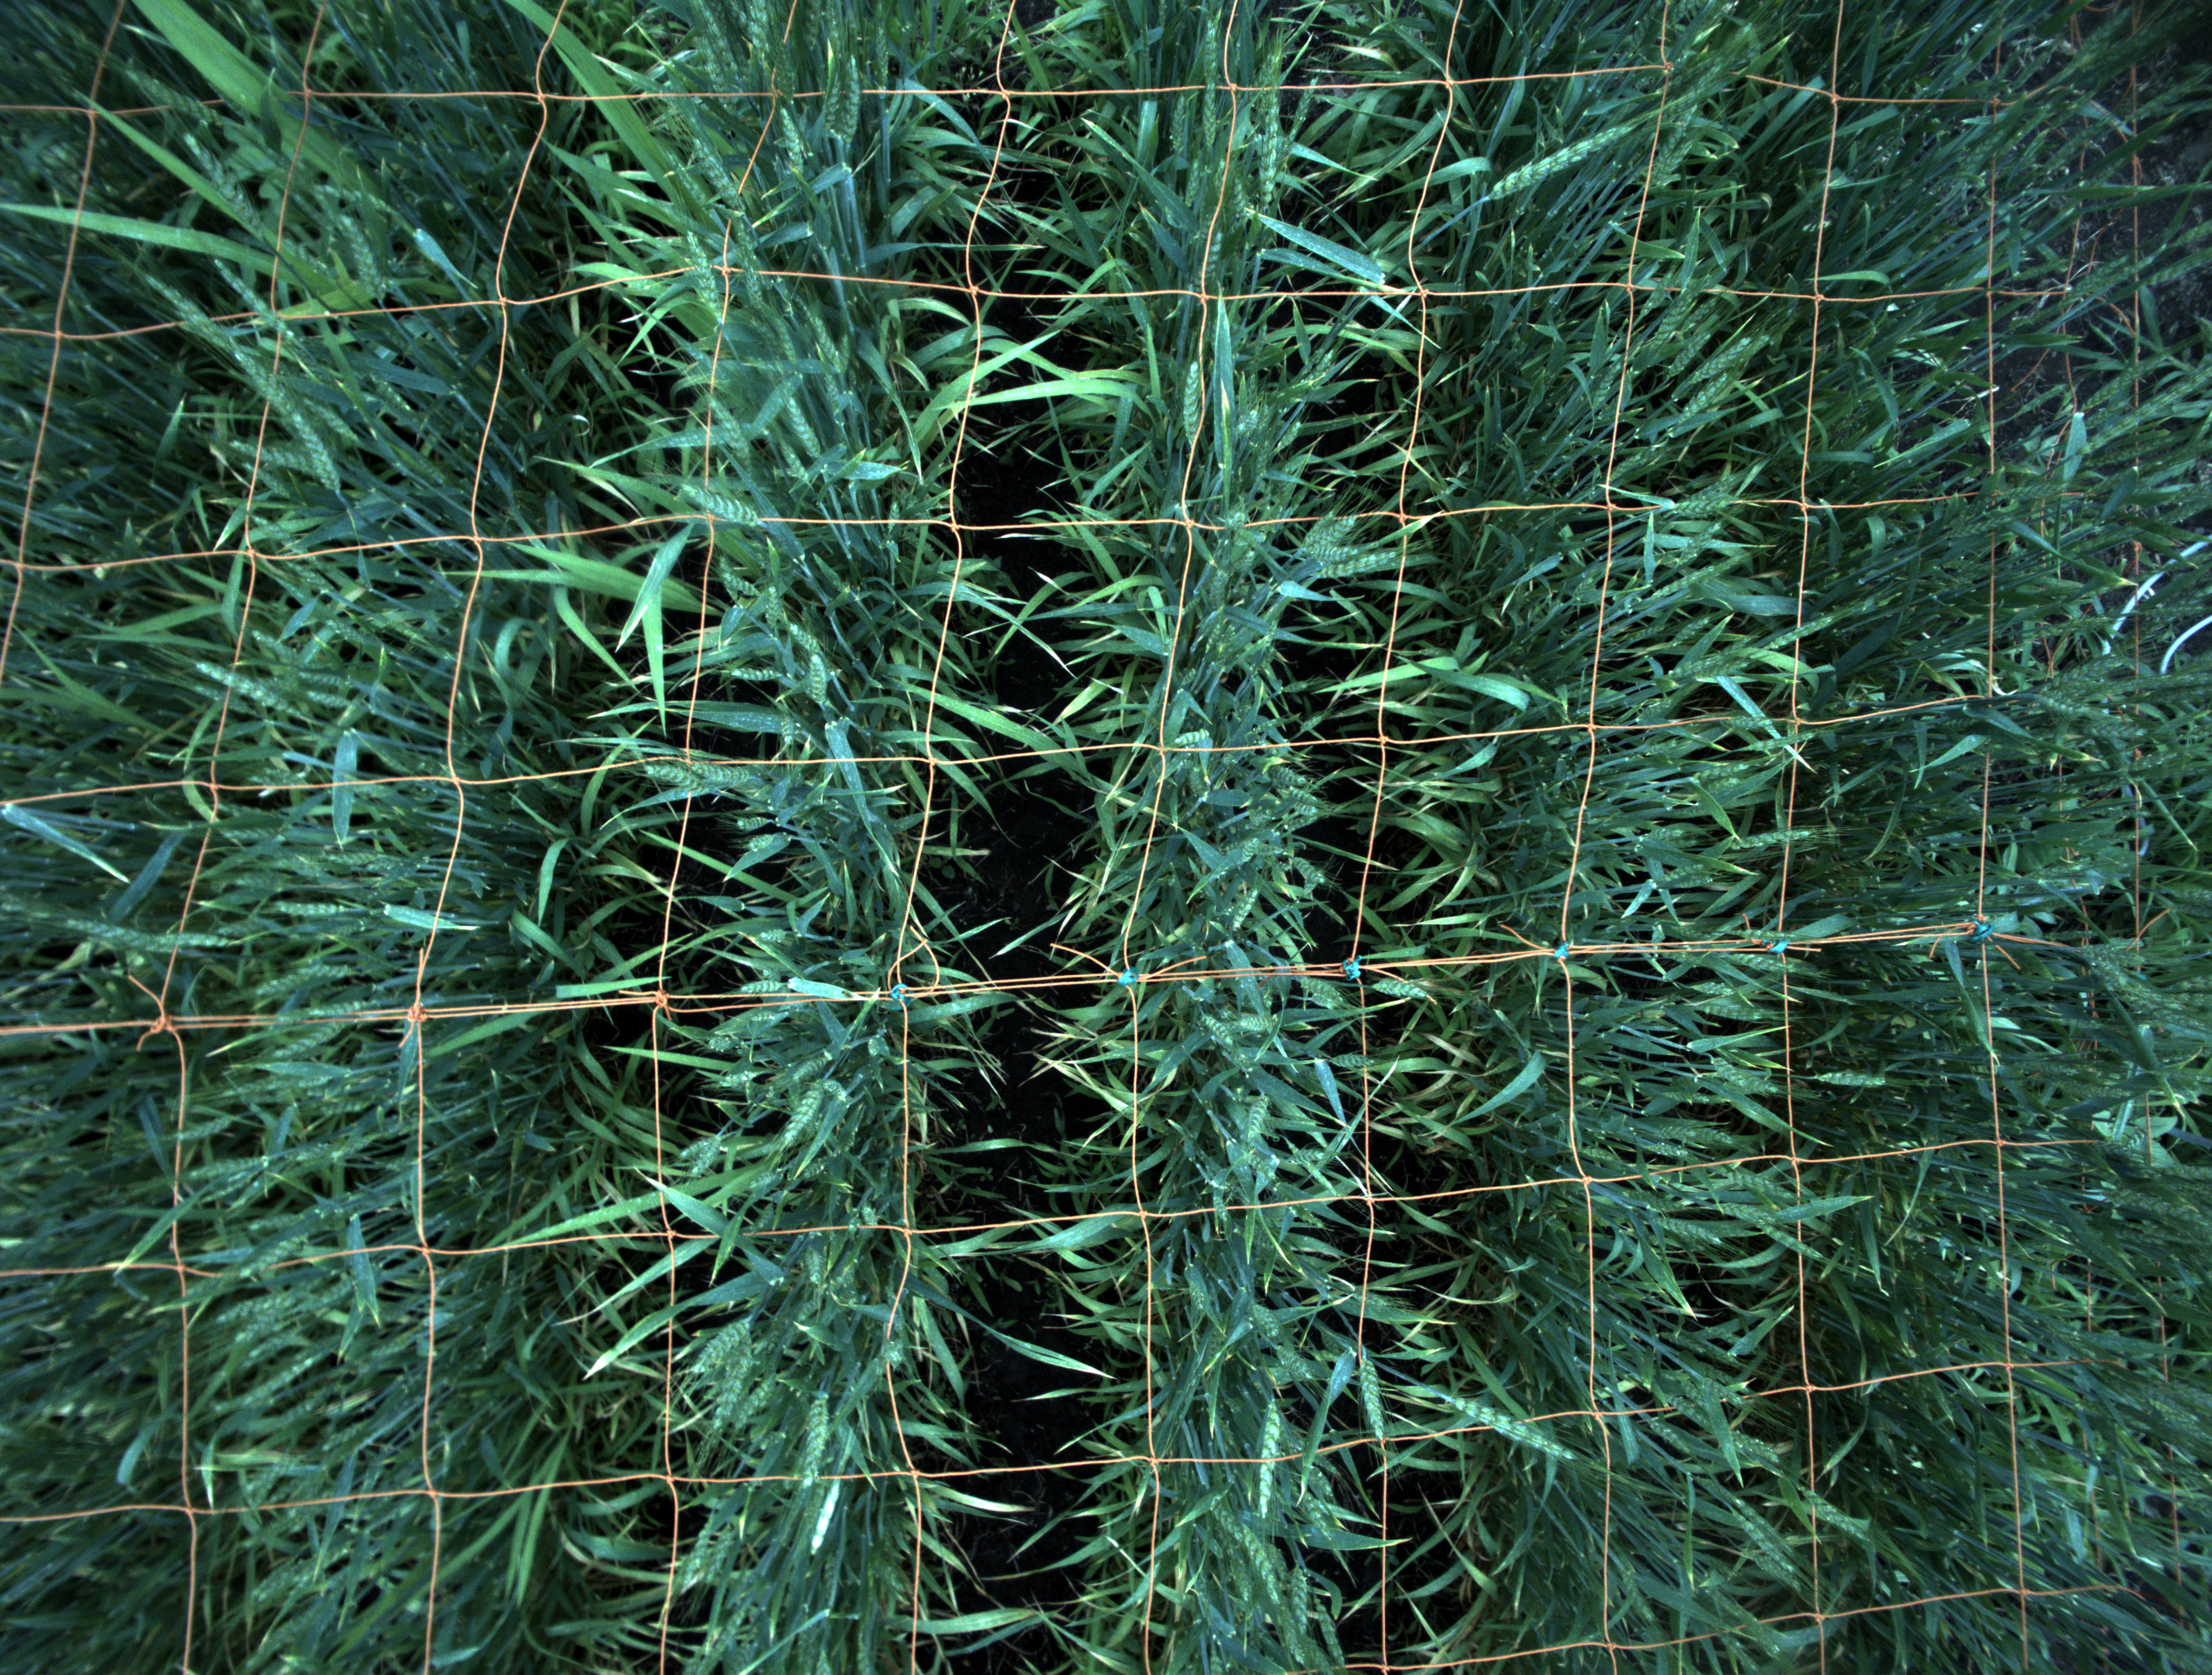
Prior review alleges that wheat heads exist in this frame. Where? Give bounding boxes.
[692,138,744,210]
[1196,1569,1213,1602]
[1654,1125,1697,1141]
[800,1481,826,1539]
[2145,251,2211,286]
[302,660,335,670]
[2080,398,2132,428]
[1735,1498,1794,1555]
[803,1640,816,1673]
[816,1649,832,1675]
[1645,696,1672,715]
[864,1562,874,1586]
[2143,1276,2195,1310]
[2118,991,2210,1040]
[2133,1381,2199,1419]
[304,688,352,707]
[824,372,840,403]
[1248,809,1271,826]
[226,1169,248,1182]
[183,130,265,236]
[1746,730,1814,752]
[1240,1519,1281,1601]
[1217,654,1228,669]
[2125,76,2198,121]
[142,272,234,353]
[1371,976,1427,999]
[2102,1187,2206,1225]
[1312,510,1334,532]
[1259,1400,1282,1518]
[379,1293,417,1320]
[2152,1047,2210,1060]
[240,1093,285,1106]
[1255,843,1283,856]
[1950,126,2006,183]
[717,553,739,602]
[688,113,712,150]
[2174,884,2211,907]
[2152,1374,2206,1412]
[238,1226,317,1280]
[1227,201,1254,233]
[1654,862,1704,884]
[888,501,900,531]
[748,312,784,355]
[1702,1552,1738,1578]
[397,1116,428,1138]
[257,1537,356,1604]
[2090,966,2117,992]
[1696,1354,1748,1393]
[2119,1154,2161,1179]
[751,1008,776,1023]
[1203,17,1219,83]
[731,665,781,683]
[1739,333,1770,362]
[2058,1017,2105,1030]
[1662,1090,1711,1104]
[1205,1325,1223,1375]
[1654,278,1683,308]
[799,1398,829,1488]
[1724,716,1775,732]
[394,861,421,882]
[1276,1343,1312,1379]
[1897,178,1914,192]
[294,1330,344,1359]
[738,816,768,831]
[1232,885,1258,932]
[1215,1518,1235,1560]
[1729,829,1809,853]
[901,22,914,33]
[385,1155,407,1173]
[1707,1324,1742,1345]
[762,966,783,982]
[2007,482,2069,499]
[1157,0,1168,25]
[1690,979,1734,999]
[274,1019,346,1059]
[1638,269,1672,317]
[1729,1427,1780,1463]
[737,246,764,309]
[1182,666,1197,685]
[2101,1514,2177,1560]
[328,923,356,939]
[1255,440,1269,477]
[268,1480,304,1504]
[747,833,774,853]
[302,397,360,442]
[292,409,341,492]
[1702,1378,1745,1406]
[823,71,841,131]
[351,916,383,930]
[1674,499,1730,516]
[298,963,355,981]
[885,1287,904,1333]
[1696,1342,1740,1364]
[1295,363,1331,384]
[2155,1639,2202,1674]
[2006,382,2065,422]
[322,1419,370,1451]
[2051,656,2124,687]
[1210,1639,1225,1674]
[1665,1392,1715,1433]
[278,1007,317,1024]
[1300,713,1322,733]
[1212,1186,1229,1222]
[1690,1474,1733,1504]
[2077,352,2169,411]
[1658,1331,1708,1354]
[1291,854,1326,885]
[1276,1182,1324,1228]
[2095,958,2124,987]
[840,53,861,144]
[1795,1482,1871,1542]
[2175,991,2210,1008]
[1296,1436,1338,1474]
[1675,273,1712,306]
[1609,452,1642,482]
[1631,445,1668,470]
[1691,658,1748,678]
[1267,762,1305,786]
[1230,1550,1247,1603]
[1694,1001,1762,1023]
[1644,736,1676,756]
[843,1264,855,1285]
[740,221,755,258]
[1723,39,1764,76]
[1893,17,1903,37]
[223,827,280,840]
[215,802,264,818]
[1223,1020,1236,1034]
[2049,90,2099,132]
[2165,552,2210,572]
[713,1330,754,1428]
[356,100,388,128]
[1249,54,1278,101]
[1260,985,1274,1008]
[763,1351,777,1401]
[724,1640,751,1675]
[1181,933,1197,948]
[1261,94,1270,115]
[204,1168,260,1201]
[2008,51,2051,92]
[308,998,372,1016]
[260,766,300,783]
[1653,55,1713,94]
[802,1155,832,1176]
[1676,519,1721,566]
[415,458,439,479]
[284,1467,326,1529]
[1232,512,1246,530]
[746,0,768,64]
[1975,1119,2003,1129]
[366,885,397,901]
[1660,948,1703,967]
[705,390,752,476]
[728,1,766,54]
[748,1169,775,1188]
[1943,559,1991,572]
[1929,804,1958,820]
[1645,130,1657,150]
[1303,515,1357,547]
[1246,409,1260,431]
[1210,316,1218,353]
[2085,775,2131,795]
[1579,1145,1616,1162]
[2108,952,2147,968]
[2191,648,2211,662]
[802,0,823,51]
[688,762,748,784]
[234,870,285,892]
[1621,1187,1683,1211]
[1219,756,1239,766]
[242,1325,302,1367]
[1727,949,1796,975]
[684,1655,702,1672]
[1262,479,1279,500]
[1418,644,1441,655]
[296,1074,332,1088]
[1283,680,1309,695]
[247,1349,331,1402]
[2103,501,2130,524]
[2126,1125,2152,1147]
[2101,672,2210,693]
[1320,1329,1341,1357]
[1330,1050,1375,1069]
[847,1216,860,1232]
[124,67,233,126]
[1709,1053,1747,1088]
[1238,1224,1275,1249]
[1205,624,1222,653]
[786,394,822,458]
[857,1640,873,1673]
[156,933,233,948]
[1218,624,1235,651]
[1668,50,1692,76]
[1244,1151,1276,1179]
[374,856,396,868]
[192,685,256,715]
[1351,1285,1388,1306]
[234,353,296,427]
[2036,615,2117,639]
[1247,1340,1260,1360]
[1207,567,1228,610]
[692,1136,721,1176]
[1954,757,1996,774]
[1288,811,1319,830]
[786,1078,827,1144]
[2165,972,2211,992]
[2076,1134,2132,1155]
[814,314,842,371]
[779,436,810,483]
[689,1317,749,1373]
[832,578,847,591]
[2047,929,2099,941]
[2185,722,2211,739]
[796,1374,811,1397]
[286,559,336,592]
[1225,900,1241,914]
[1241,838,1261,862]
[2128,750,2177,770]
[217,921,265,937]
[1170,95,1188,148]
[190,1154,262,1179]
[1947,984,1987,1000]
[243,462,290,496]
[2174,220,2211,245]
[1573,576,1594,597]
[1691,1127,1733,1147]
[682,1524,712,1585]
[1184,156,1200,206]
[1687,336,1752,383]
[1290,1563,1308,1628]
[1762,613,1834,651]
[2177,1182,2211,1204]
[880,1521,892,1550]
[1943,516,2014,539]
[1669,635,1753,677]
[2085,459,2152,495]
[217,1290,289,1323]
[1264,1540,1288,1580]
[2043,1319,2084,1349]
[308,985,347,999]
[2036,687,2091,715]
[2077,525,2133,552]
[876,1347,906,1369]
[1236,415,1250,437]
[2131,981,2182,1009]
[1177,1465,1188,1499]
[810,1478,841,1554]
[1224,1395,1242,1413]
[2097,826,2147,845]
[1949,493,1995,527]
[1666,330,1713,378]
[1234,176,1248,226]
[2017,257,2068,281]
[2179,1495,2211,1521]
[759,1428,787,1449]
[1182,359,1201,445]
[1451,1394,1576,1460]
[2151,1397,2204,1443]
[2076,366,2211,456]
[2121,585,2210,649]
[1693,760,1748,781]
[244,1455,300,1490]
[1676,372,1730,422]
[735,1377,777,1429]
[2139,43,2189,89]
[1304,1490,1332,1540]
[277,1379,340,1426]
[868,1038,882,1058]
[759,927,785,944]
[1240,703,1251,718]
[728,25,753,92]
[690,2,741,85]
[1985,1169,2019,1189]
[341,214,390,300]
[1713,1200,1777,1224]
[838,333,849,373]
[1258,96,1279,204]
[1685,804,1710,815]
[1696,1,1739,33]
[282,238,342,280]
[2037,121,2101,172]
[879,1558,906,1594]
[248,1560,291,1608]
[1244,1096,1270,1139]
[1971,241,2011,268]
[2029,899,2070,912]
[62,918,184,957]
[326,851,376,867]
[1717,1164,1795,1200]
[1204,81,1217,147]
[706,1523,730,1581]
[1309,1464,1332,1497]
[1293,800,1318,814]
[773,317,796,367]
[1650,553,1740,599]
[709,1,730,30]
[1141,21,1150,62]
[2078,944,2116,958]
[320,1100,364,1115]
[642,762,711,794]
[1188,1277,1205,1311]
[1288,786,1318,806]
[741,980,783,993]
[1288,1142,1332,1190]
[2055,1078,2134,1101]
[803,1247,825,1284]
[697,1604,748,1675]
[248,627,300,660]
[1665,838,1696,849]
[1705,1585,1742,1617]
[681,1136,718,1160]
[384,619,427,644]
[234,1308,288,1343]
[1215,156,1226,200]
[1664,875,1713,889]
[809,654,826,703]
[1705,777,1741,796]
[1592,361,1621,409]
[237,1073,295,1096]
[1254,718,1276,732]
[1669,923,1711,941]
[721,1067,758,1087]
[174,1113,233,1140]
[367,370,416,414]
[1921,363,1947,387]
[2091,255,2155,290]
[301,1279,356,1313]
[861,1203,878,1225]
[1304,869,1324,893]
[2157,1160,2209,1181]
[1731,22,1752,43]
[1637,623,1665,638]
[789,622,821,655]
[363,1500,400,1530]
[683,229,723,320]
[1738,1069,1780,1094]
[2095,569,2160,596]
[847,367,858,389]
[183,1262,236,1297]
[2138,605,2203,619]
[1313,1593,1345,1665]
[298,670,345,687]
[2079,5,2198,70]
[1237,1050,1248,1064]
[1729,928,1797,942]
[1299,974,1344,1003]
[873,25,890,86]
[2074,5,2134,61]
[1590,766,1620,777]
[330,1133,374,1159]
[2150,1068,2212,1083]
[836,1128,857,1153]
[2012,1057,2084,1077]
[382,327,410,350]
[2018,1433,2048,1465]
[1194,232,1223,301]
[1939,718,1976,730]
[324,618,366,644]
[1253,532,1268,543]
[1306,348,1325,366]
[272,1591,330,1645]
[2121,1221,2191,1244]
[2082,1262,2121,1282]
[1248,374,1256,395]
[2056,255,2128,305]
[763,586,782,627]
[1238,1016,1277,1032]
[297,1142,334,1163]
[1653,993,1683,1009]
[1308,543,1359,563]
[1679,473,1734,504]
[1315,549,1397,580]
[32,588,73,616]
[40,1007,109,1025]
[1648,1417,1690,1453]
[2091,1166,2128,1189]
[314,190,336,223]
[841,1444,855,1465]
[248,1211,301,1231]
[2085,438,2162,466]
[292,190,335,231]
[1288,76,1318,143]
[201,71,252,120]
[1651,1215,1721,1244]
[758,1202,774,1229]
[1256,402,1270,432]
[1200,1012,1232,1044]
[826,0,841,55]
[1310,991,1334,1009]
[2140,687,2211,705]
[1264,649,1275,665]
[1185,594,1201,614]
[779,104,804,174]
[1964,895,2023,911]
[2129,1450,2206,1478]
[2171,902,2211,919]
[226,438,318,475]
[194,660,302,717]
[1682,297,1716,331]
[290,345,335,386]
[718,570,761,597]
[797,1633,808,1665]
[707,1035,731,1052]
[1315,350,1333,371]
[91,547,120,579]
[252,1477,274,1507]
[1931,572,1975,598]
[375,748,411,772]
[366,860,387,872]
[1731,1508,1797,1574]
[1239,550,1255,575]
[824,1552,837,1603]
[1275,421,1301,450]
[2020,879,2068,893]
[1647,826,1684,840]
[1749,1552,1801,1593]
[1280,1596,1306,1665]
[1816,1067,1886,1089]
[1266,619,1278,648]
[2114,1228,2167,1245]
[1627,2,1664,51]
[1665,83,1714,117]
[1680,61,1724,97]
[280,1273,327,1307]
[214,258,296,342]
[2081,718,2147,741]
[2023,859,2080,878]
[2059,676,2105,697]
[1645,1139,1689,1161]
[663,149,707,205]
[1250,1623,1264,1655]
[328,1200,366,1226]
[1657,105,1698,163]
[777,711,797,745]
[1649,140,1694,187]
[1489,125,1632,203]
[2158,496,2210,523]
[1174,727,1210,745]
[258,974,309,996]
[701,33,737,116]
[791,1054,828,1081]
[679,480,759,528]
[354,784,382,796]
[1649,298,1692,353]
[1257,741,1277,754]
[2073,1394,2152,1431]
[1200,204,1218,239]
[825,1081,845,1096]
[1305,1633,1334,1674]
[368,1325,421,1357]
[1277,859,1292,873]
[311,184,388,212]
[2011,306,2052,327]
[1277,461,1291,498]
[254,676,298,696]
[1665,1,1700,27]
[1677,1230,1705,1252]
[1188,770,1206,797]
[1291,485,1307,509]
[757,550,767,568]
[250,514,324,572]
[814,1269,842,1297]
[2065,155,2127,210]
[1359,1356,1386,1440]
[767,1311,788,1353]
[1678,1377,1708,1408]
[1666,616,1711,648]
[1215,1414,1236,1446]
[2164,484,2201,506]
[1288,1147,1327,1164]
[306,1088,324,1098]
[1740,1607,1783,1660]
[1253,323,1267,364]
[1248,1300,1281,1337]
[246,773,288,786]
[797,1295,820,1322]
[2089,808,2152,818]
[1755,1220,1823,1259]
[769,8,795,101]
[1997,106,2045,158]
[1617,1565,1654,1621]
[1212,1504,1245,1549]
[1224,838,1246,851]
[275,899,345,917]
[796,295,816,329]
[1567,687,1589,699]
